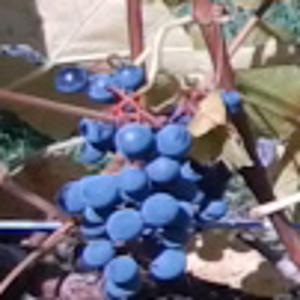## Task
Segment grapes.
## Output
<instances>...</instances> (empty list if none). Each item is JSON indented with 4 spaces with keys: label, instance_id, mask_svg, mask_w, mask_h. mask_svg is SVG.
<instances>
[{
    "label": "grapes",
    "instance_id": "2",
    "mask_svg": "<svg viewBox=\"0 0 300 300\" xmlns=\"http://www.w3.org/2000/svg\"><path fill=\"white\" fill-rule=\"evenodd\" d=\"M241 93L237 90L222 91L221 104L228 117L240 114Z\"/></svg>",
    "mask_w": 300,
    "mask_h": 300
},
{
    "label": "grapes",
    "instance_id": "1",
    "mask_svg": "<svg viewBox=\"0 0 300 300\" xmlns=\"http://www.w3.org/2000/svg\"><path fill=\"white\" fill-rule=\"evenodd\" d=\"M143 82L140 65H121L114 74L70 66L52 76L56 94L82 93L90 103L108 105L112 120L80 118V160L123 168L64 179L57 187L59 211L78 216L86 240L76 262L84 272H102L107 300L134 295L141 263L154 281L177 283L186 271V223H213L229 213L226 198L205 196V171L186 157L192 118L156 114Z\"/></svg>",
    "mask_w": 300,
    "mask_h": 300
}]
</instances>
